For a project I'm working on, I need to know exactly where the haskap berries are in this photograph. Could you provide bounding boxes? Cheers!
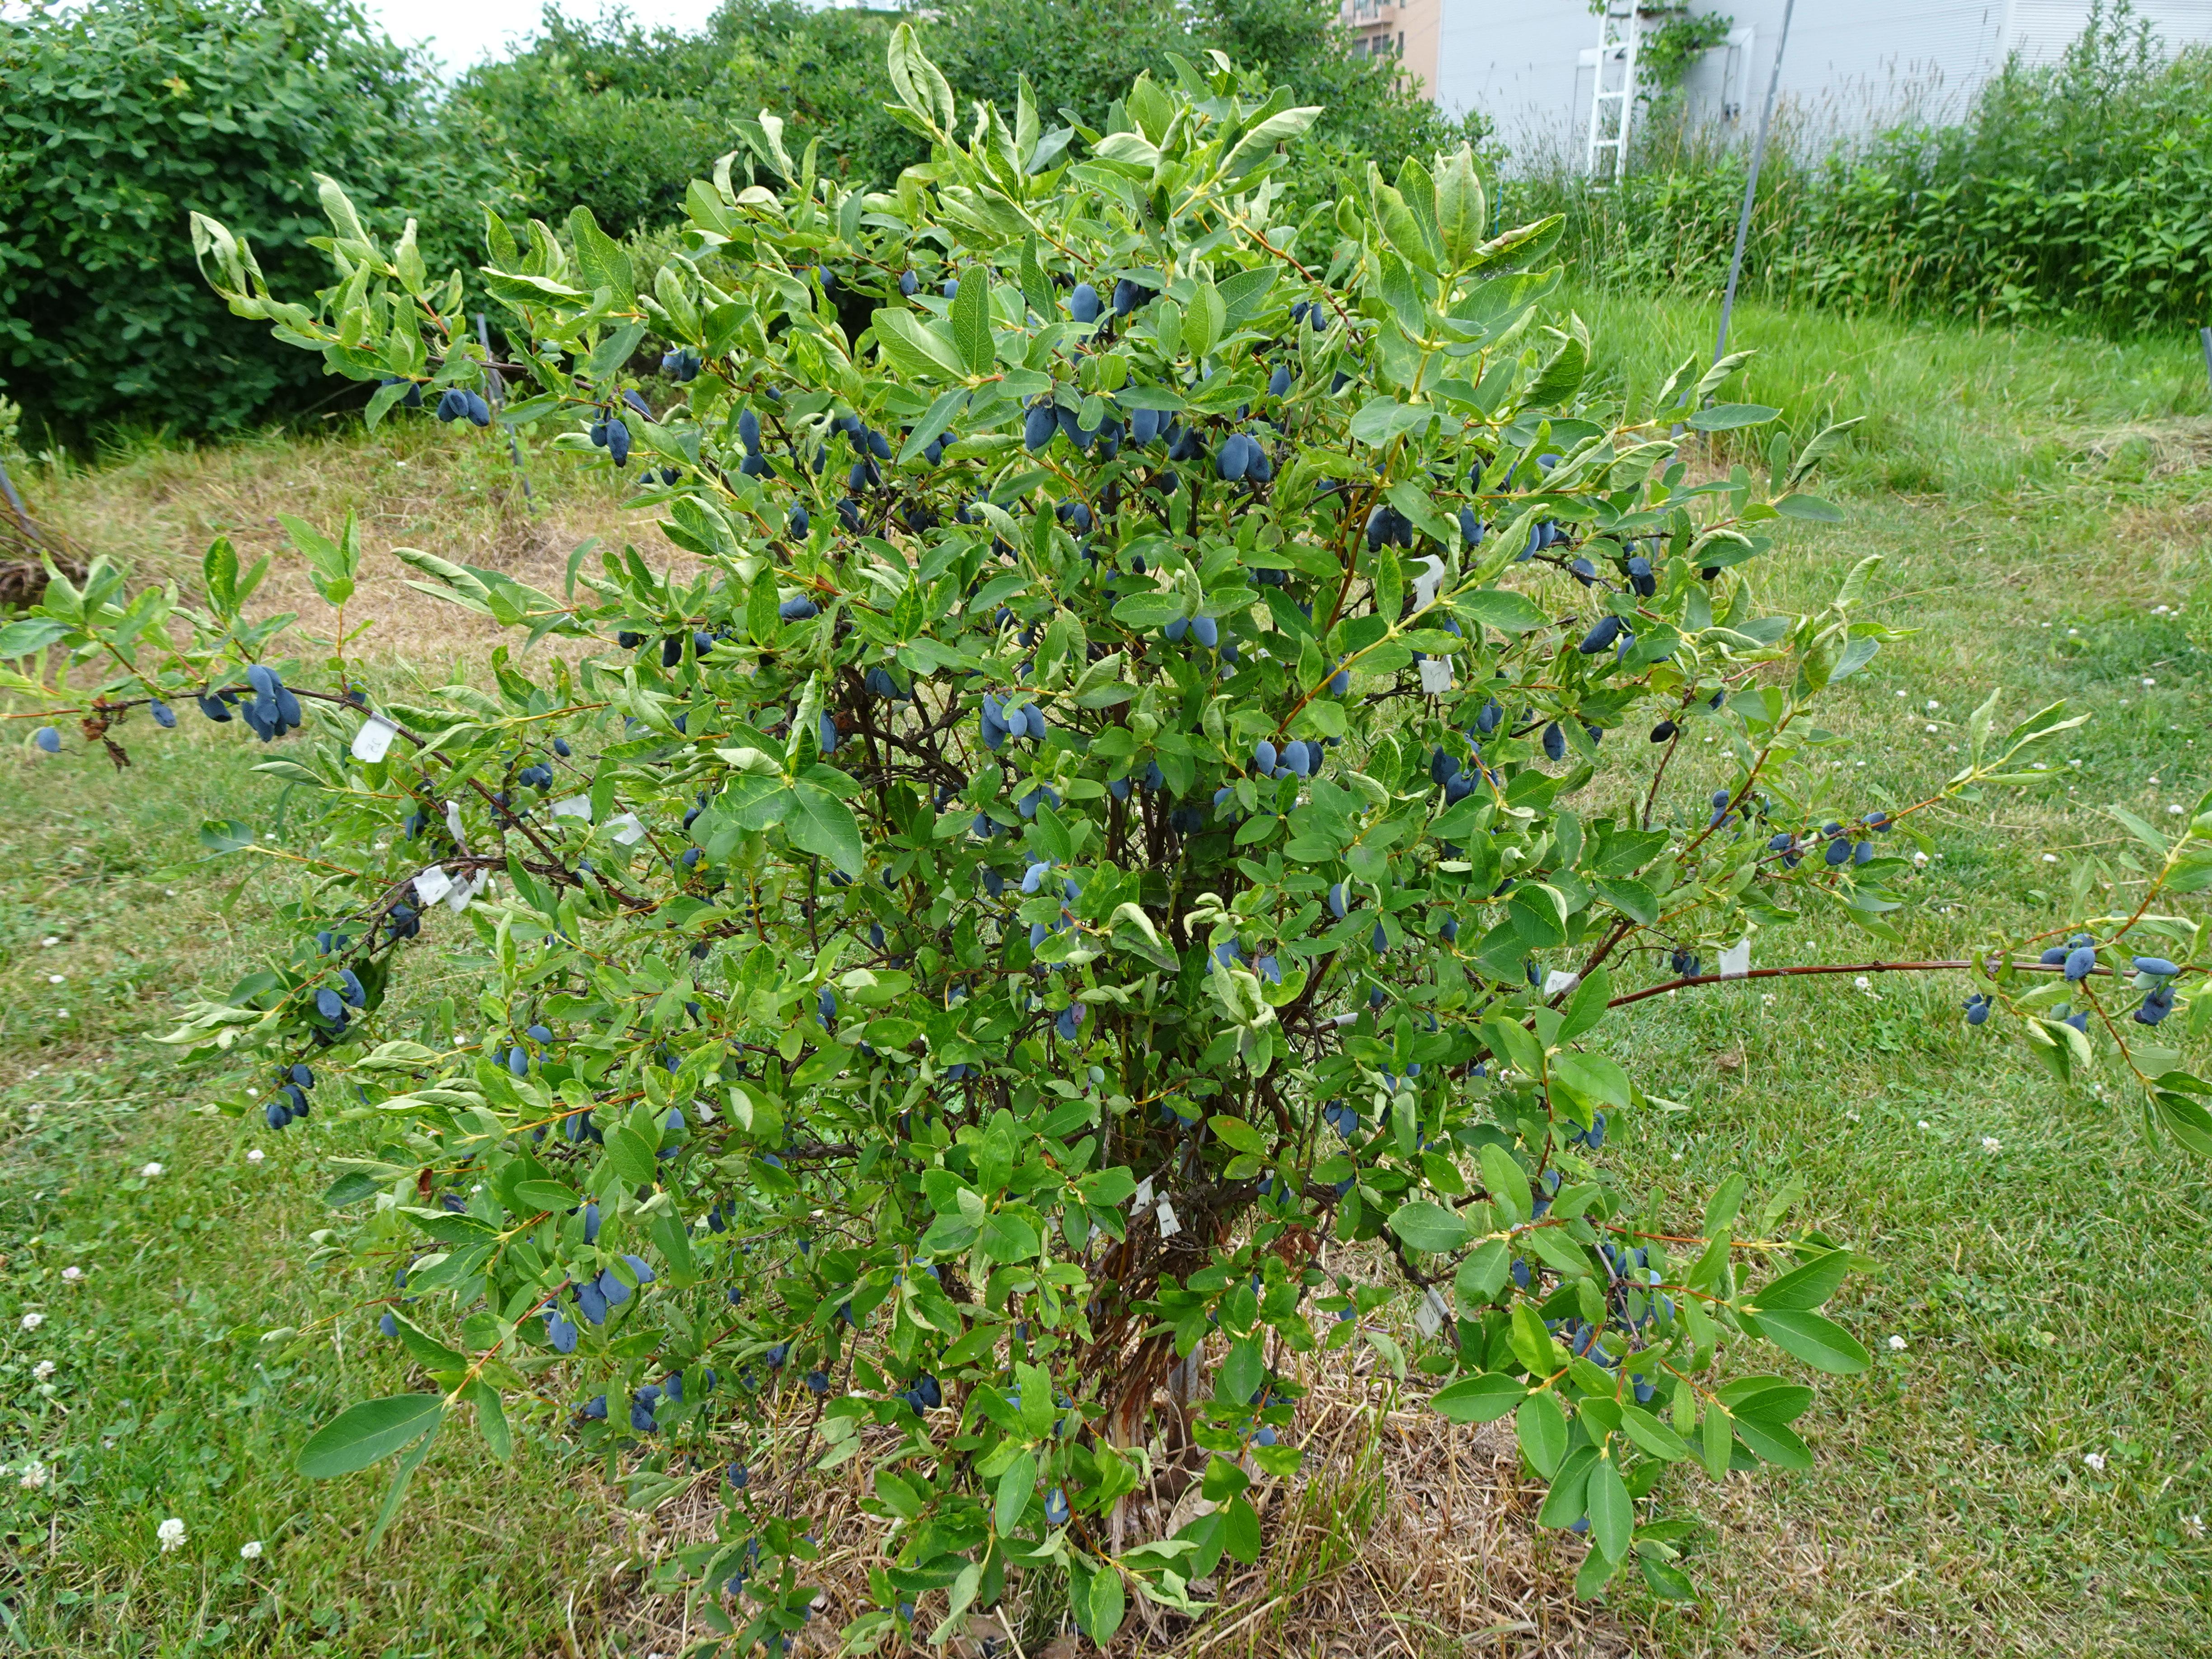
[2060,1008,2091,1034]
[1223,430,1249,482]
[660,1043,679,1074]
[800,904,809,918]
[590,420,612,449]
[804,601,819,618]
[1711,804,1739,827]
[1190,431,1210,462]
[1251,1273,1260,1295]
[340,1007,351,1023]
[348,685,365,704]
[240,694,274,735]
[739,1364,750,1379]
[781,1139,799,1157]
[1258,1428,1276,1445]
[1523,709,1533,722]
[997,499,1008,513]
[1417,1132,1433,1151]
[908,509,928,534]
[671,848,699,868]
[798,1237,813,1255]
[1116,422,1125,442]
[1277,1390,1293,1404]
[380,375,400,387]
[1191,614,1219,649]
[1541,1318,1561,1336]
[1476,705,1492,734]
[391,1268,411,1291]
[710,1206,731,1235]
[268,1104,284,1130]
[1779,843,1804,869]
[1439,919,1459,942]
[693,632,714,657]
[868,428,892,459]
[660,467,675,487]
[1426,472,1435,478]
[698,791,702,805]
[1073,352,1084,364]
[1074,501,1093,531]
[831,417,854,440]
[729,1579,741,1594]
[1219,417,1230,432]
[566,1271,582,1303]
[765,386,783,406]
[537,759,552,792]
[699,791,708,808]
[449,389,472,417]
[630,1402,656,1434]
[575,1195,604,1241]
[1141,763,1166,793]
[1421,1014,1438,1032]
[1255,741,1275,777]
[737,408,761,455]
[1614,1286,1639,1311]
[1485,764,1498,785]
[1163,412,1185,448]
[1045,1486,1070,1528]
[928,514,940,529]
[1431,470,1449,480]
[1457,507,1485,546]
[609,421,632,467]
[1472,768,1482,794]
[1207,936,1252,974]
[1021,663,1034,681]
[1445,842,1463,859]
[683,807,702,831]
[1384,1074,1396,1092]
[638,469,657,483]
[682,1001,701,1026]
[1335,1149,1350,1157]
[852,424,868,454]
[536,1051,548,1070]
[438,394,457,422]
[1086,640,1109,665]
[1023,409,1032,420]
[848,463,865,493]
[336,970,366,1008]
[761,460,777,479]
[1297,600,1312,618]
[1683,956,1701,980]
[385,918,400,943]
[1022,860,1050,894]
[1108,776,1132,805]
[1114,277,1137,317]
[858,1040,882,1061]
[715,632,726,639]
[876,668,897,699]
[292,1062,317,1091]
[967,669,984,679]
[1090,1300,1102,1317]
[1650,655,1668,664]
[920,503,928,512]
[1256,1177,1277,1194]
[601,1265,637,1308]
[1267,365,1293,398]
[1319,319,1326,331]
[1490,696,1501,725]
[903,1392,924,1418]
[2062,933,2097,952]
[729,1287,742,1305]
[741,1244,751,1255]
[1099,387,1121,436]
[1507,467,1514,486]
[1368,505,1391,554]
[660,348,683,371]
[1130,555,1146,575]
[1628,557,1651,577]
[1535,520,1556,552]
[726,1462,750,1490]
[379,1312,401,1339]
[1003,544,1013,557]
[804,1536,817,1549]
[655,1146,677,1162]
[864,663,883,693]
[1531,1191,1555,1221]
[1052,896,1080,934]
[1368,988,1383,1007]
[1026,315,1037,329]
[1824,837,1852,867]
[1102,568,1119,600]
[1650,720,1678,745]
[1490,828,1496,836]
[1437,537,1451,552]
[1642,1244,1652,1267]
[1008,912,1019,924]
[897,1601,918,1624]
[1711,789,1728,806]
[1615,1303,1648,1327]
[318,987,343,1018]
[1204,365,1213,380]
[751,666,758,678]
[1363,460,1387,475]
[1168,426,1196,461]
[778,1633,796,1656]
[1412,649,1426,668]
[995,607,1013,631]
[1310,303,1324,332]
[1337,1305,1356,1322]
[1581,1341,1612,1370]
[785,506,810,541]
[933,799,944,813]
[1441,617,1461,639]
[632,1386,663,1401]
[801,1605,811,1621]
[1876,823,1892,833]
[875,529,887,541]
[1252,566,1286,587]
[1373,919,1389,954]
[783,1342,790,1354]
[727,1040,744,1057]
[2038,946,2070,964]
[1053,1398,1072,1437]
[1081,301,1106,342]
[1602,1238,1616,1259]
[493,791,511,816]
[805,1371,831,1397]
[1161,1091,1181,1124]
[767,1342,784,1364]
[1671,946,1690,974]
[899,419,915,436]
[1024,398,1057,452]
[441,1192,465,1213]
[780,593,807,616]
[836,501,866,535]
[1177,1112,1192,1128]
[743,899,764,918]
[923,436,945,466]
[1630,1264,1655,1290]
[619,1253,654,1286]
[1064,879,1084,898]
[955,501,971,523]
[1262,1395,1275,1409]
[704,1369,717,1392]
[1149,469,1179,496]
[1323,735,1342,751]
[967,579,980,598]
[674,1371,685,1379]
[554,736,570,758]
[947,1060,963,1080]
[1862,809,1889,829]
[272,1063,291,1084]
[566,1401,585,1424]
[817,990,836,1017]
[540,1296,561,1322]
[1172,799,1207,838]
[911,1257,941,1287]
[1586,1122,1604,1151]
[1083,542,1097,568]
[399,915,415,939]
[1382,1061,1390,1072]
[974,490,989,521]
[280,1105,295,1124]
[1526,962,1544,988]
[510,1043,528,1077]
[1020,277,1061,306]
[325,1015,346,1033]
[282,1086,312,1118]
[1651,1291,1676,1325]
[37,728,60,752]
[1226,405,1244,421]
[1570,1515,1590,1532]
[893,670,913,702]
[1126,375,1135,386]
[1030,922,1050,949]
[1154,747,1191,801]
[1574,1324,1595,1356]
[889,955,905,970]
[1329,882,1350,919]
[1615,634,1641,664]
[1431,748,1460,786]
[985,870,1003,898]
[1010,549,1019,559]
[913,1373,941,1408]
[1435,456,1453,464]
[550,931,565,946]
[1105,221,1112,230]
[1518,525,1540,563]
[838,869,852,897]
[1821,821,1845,841]
[2050,1003,2070,1022]
[1378,1107,1392,1125]
[720,625,737,643]
[1459,736,1484,766]
[413,918,421,937]
[666,1376,684,1403]
[1334,1177,1357,1206]
[630,1100,639,1113]
[454,1180,465,1188]
[1615,1248,1643,1277]
[519,768,535,785]
[1060,272,1076,289]
[525,1025,553,1044]
[1024,994,1032,1012]
[673,716,683,732]
[817,266,839,298]
[1326,1099,1343,1123]
[1251,417,1259,437]
[197,692,233,722]
[1049,961,1068,970]
[1017,619,1037,649]
[831,1298,854,1331]
[1238,1417,1258,1441]
[700,896,715,906]
[1288,304,1307,324]
[1157,409,1173,434]
[1627,577,1640,597]
[939,432,959,449]
[980,707,1006,751]
[883,867,900,891]
[1055,496,1074,528]
[1332,353,1369,394]
[1496,471,1509,493]
[633,1185,653,1203]
[565,1111,597,1142]
[1100,483,1122,514]
[1184,365,1198,390]
[1468,1063,1488,1083]
[900,267,919,297]
[1261,954,1285,986]
[943,984,966,1003]
[1318,1165,1352,1202]
[902,1112,912,1131]
[333,934,348,950]
[736,1566,750,1579]
[901,495,917,520]
[403,808,425,841]
[398,378,424,407]
[1475,1007,1484,1017]
[1326,658,1350,695]
[584,1108,607,1143]
[974,472,984,492]
[1278,1184,1290,1205]
[1008,499,1021,519]
[594,398,610,424]
[1707,688,1725,710]
[1567,1117,1584,1142]
[1340,1106,1358,1136]
[1418,458,1423,465]
[1512,461,1518,470]
[972,813,989,838]
[316,932,332,954]
[1240,431,1275,486]
[503,1035,515,1045]
[1543,718,1568,761]
[151,697,179,727]
[1492,877,1515,899]
[1016,1324,1029,1341]
[1088,1065,1106,1083]
[1023,394,1035,411]
[1763,799,1771,815]
[2135,991,2174,1026]
[863,455,880,486]
[982,866,993,885]
[694,940,710,959]
[1024,847,1061,866]
[984,694,1016,729]
[1286,740,1309,778]
[245,666,273,699]
[782,1122,791,1134]
[431,839,458,860]
[641,1400,656,1419]
[1459,1029,1469,1034]
[1767,831,1794,848]
[1534,454,1563,467]
[1136,266,1159,306]
[741,452,764,479]
[626,717,638,729]
[493,1049,505,1065]
[1577,612,1618,656]
[1205,412,1221,427]
[991,819,1005,835]
[1623,542,1636,553]
[532,1126,547,1142]
[789,447,797,457]
[465,390,492,427]
[1632,1373,1657,1402]
[2065,947,2097,980]
[992,537,1003,558]
[814,1014,828,1031]
[1542,1168,1559,1197]
[997,914,1008,936]
[1070,282,1102,323]
[2132,971,2161,991]
[1510,1259,1532,1289]
[1639,574,1656,596]
[1098,424,1118,460]
[1319,480,1338,491]
[1018,783,1037,820]
[1057,1001,1078,1043]
[1854,840,1872,868]
[529,765,546,784]
[1966,999,1988,1027]
[1472,461,1490,484]
[1054,339,1063,346]
[671,466,683,486]
[696,847,703,852]
[1212,1308,1220,1324]
[829,870,842,886]
[1071,1002,1084,1024]
[806,437,825,474]
[546,1313,579,1355]
[816,712,838,754]
[1444,771,1472,807]
[1249,1389,1261,1405]
[1700,564,1722,584]
[1393,508,1415,549]
[1157,377,1168,385]
[618,631,643,650]
[1165,615,1190,641]
[1566,1316,1583,1336]
[310,1025,334,1048]
[1099,484,1108,497]
[1054,391,1091,450]
[1008,708,1026,744]
[687,1224,694,1238]
[893,1269,905,1285]
[662,1108,687,1135]
[1041,782,1062,813]
[623,390,650,420]
[680,349,701,382]
[679,713,689,724]
[743,1372,755,1388]
[1579,722,1604,747]
[1132,394,1160,449]
[414,780,446,814]
[542,340,560,353]
[1594,1111,1607,1129]
[1572,556,1596,589]
[938,780,962,803]
[584,1395,607,1418]
[1213,786,1236,817]
[275,683,304,731]
[943,280,959,299]
[2132,956,2181,974]
[795,262,813,277]
[462,1154,472,1161]
[1241,403,1250,419]
[1270,419,1284,449]
[659,635,684,668]
[579,1277,607,1326]
[1221,642,1237,662]
[1620,616,1634,640]
[749,1541,760,1557]
[576,861,592,880]
[1404,1062,1420,1077]
[868,923,889,953]
[408,1296,418,1302]
[764,1154,783,1171]
[840,414,863,435]
[1196,1093,1210,1106]
[1004,1384,1021,1410]
[724,1198,737,1217]
[408,890,420,907]
[1017,705,1046,743]
[389,904,418,923]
